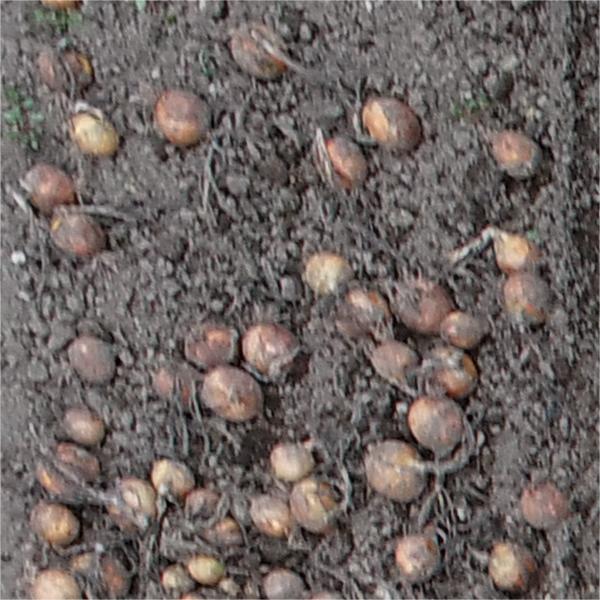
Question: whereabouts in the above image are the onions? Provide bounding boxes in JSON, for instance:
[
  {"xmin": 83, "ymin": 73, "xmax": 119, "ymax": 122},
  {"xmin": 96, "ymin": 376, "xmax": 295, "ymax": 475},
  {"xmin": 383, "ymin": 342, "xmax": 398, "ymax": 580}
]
[
  {"xmin": 184, "ymin": 486, "xmax": 219, "ymax": 520},
  {"xmin": 28, "ymin": 568, "xmax": 81, "ymax": 596},
  {"xmin": 209, "ymin": 519, "xmax": 239, "ymax": 546},
  {"xmin": 501, "ymin": 272, "xmax": 552, "ymax": 322},
  {"xmin": 68, "ymin": 555, "xmax": 124, "ymax": 592},
  {"xmin": 66, "ymin": 336, "xmax": 115, "ymax": 383},
  {"xmin": 242, "ymin": 322, "xmax": 297, "ymax": 374},
  {"xmin": 180, "ymin": 591, "xmax": 206, "ymax": 600},
  {"xmin": 151, "ymin": 365, "xmax": 189, "ymax": 402},
  {"xmin": 290, "ymin": 478, "xmax": 340, "ymax": 529},
  {"xmin": 188, "ymin": 322, "xmax": 234, "ymax": 366},
  {"xmin": 151, "ymin": 458, "xmax": 192, "ymax": 496},
  {"xmin": 370, "ymin": 339, "xmax": 419, "ymax": 386},
  {"xmin": 492, "ymin": 230, "xmax": 533, "ymax": 270},
  {"xmin": 261, "ymin": 568, "xmax": 302, "ymax": 597},
  {"xmin": 215, "ymin": 575, "xmax": 242, "ymax": 595},
  {"xmin": 405, "ymin": 395, "xmax": 467, "ymax": 451},
  {"xmin": 59, "ymin": 404, "xmax": 103, "ymax": 445},
  {"xmin": 36, "ymin": 462, "xmax": 86, "ymax": 500},
  {"xmin": 151, "ymin": 88, "xmax": 208, "ymax": 145},
  {"xmin": 232, "ymin": 23, "xmax": 288, "ymax": 78},
  {"xmin": 252, "ymin": 495, "xmax": 291, "ymax": 536},
  {"xmin": 417, "ymin": 335, "xmax": 462, "ymax": 368},
  {"xmin": 442, "ymin": 308, "xmax": 487, "ymax": 347},
  {"xmin": 303, "ymin": 250, "xmax": 349, "ymax": 295},
  {"xmin": 31, "ymin": 499, "xmax": 77, "ymax": 545},
  {"xmin": 160, "ymin": 561, "xmax": 192, "ymax": 594},
  {"xmin": 361, "ymin": 97, "xmax": 420, "ymax": 150},
  {"xmin": 391, "ymin": 531, "xmax": 440, "ymax": 580},
  {"xmin": 38, "ymin": 0, "xmax": 75, "ymax": 9},
  {"xmin": 201, "ymin": 366, "xmax": 260, "ymax": 420},
  {"xmin": 36, "ymin": 46, "xmax": 89, "ymax": 92},
  {"xmin": 362, "ymin": 440, "xmax": 427, "ymax": 503},
  {"xmin": 223, "ymin": 488, "xmax": 253, "ymax": 524},
  {"xmin": 518, "ymin": 482, "xmax": 568, "ymax": 530},
  {"xmin": 490, "ymin": 129, "xmax": 538, "ymax": 176},
  {"xmin": 335, "ymin": 285, "xmax": 389, "ymax": 343},
  {"xmin": 54, "ymin": 441, "xmax": 97, "ymax": 484},
  {"xmin": 270, "ymin": 441, "xmax": 311, "ymax": 481},
  {"xmin": 394, "ymin": 277, "xmax": 451, "ymax": 333},
  {"xmin": 114, "ymin": 477, "xmax": 158, "ymax": 520},
  {"xmin": 69, "ymin": 110, "xmax": 117, "ymax": 156},
  {"xmin": 187, "ymin": 551, "xmax": 223, "ymax": 584},
  {"xmin": 25, "ymin": 162, "xmax": 74, "ymax": 211},
  {"xmin": 314, "ymin": 588, "xmax": 346, "ymax": 600},
  {"xmin": 320, "ymin": 136, "xmax": 365, "ymax": 189},
  {"xmin": 486, "ymin": 542, "xmax": 538, "ymax": 590},
  {"xmin": 424, "ymin": 352, "xmax": 477, "ymax": 399},
  {"xmin": 49, "ymin": 208, "xmax": 103, "ymax": 259}
]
